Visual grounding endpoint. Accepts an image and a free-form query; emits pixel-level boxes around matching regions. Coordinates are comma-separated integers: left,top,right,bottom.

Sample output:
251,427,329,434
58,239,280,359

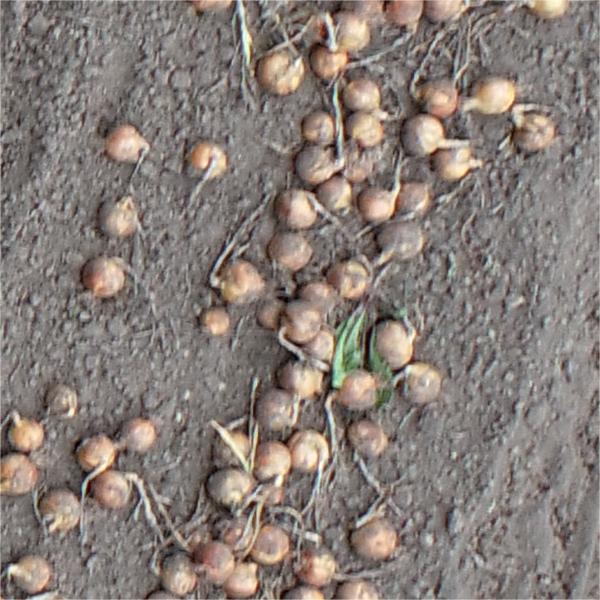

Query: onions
200,305,232,335
183,140,227,178
87,471,129,508
422,81,457,116
399,153,432,186
102,199,137,236
0,455,40,494
526,0,567,21
297,144,334,182
288,432,326,473
374,218,424,260
333,14,371,52
423,0,463,23
396,178,433,217
352,516,398,561
256,46,304,92
359,184,395,220
45,383,77,417
300,281,338,306
249,527,287,565
212,428,253,467
254,389,297,435
256,440,291,483
77,433,115,471
309,17,335,47
220,259,263,301
328,258,370,300
404,114,445,155
279,190,317,229
344,75,378,112
384,0,420,25
372,320,413,364
339,0,383,15
81,255,126,297
299,330,335,364
399,362,442,404
348,109,384,146
342,151,370,181
348,419,385,456
469,76,514,113
300,109,333,144
157,554,197,594
513,105,554,152
317,176,351,209
9,417,42,451
267,232,310,270
208,466,251,507
297,551,334,586
285,302,323,341
194,540,234,581
5,553,50,592
434,141,472,181
254,299,283,328
194,0,233,12
282,581,324,599
335,575,378,599
105,125,144,162
37,487,79,532
118,415,157,451
222,562,257,596
336,370,377,411
216,515,251,549
281,360,321,397
308,45,345,80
